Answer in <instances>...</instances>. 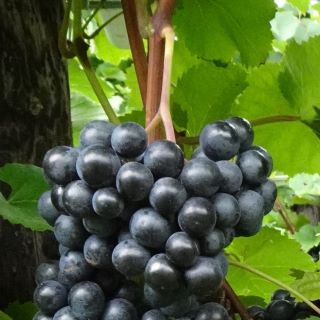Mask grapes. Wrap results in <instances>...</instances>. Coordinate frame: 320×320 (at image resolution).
<instances>
[{"label":"grapes","mask_w":320,"mask_h":320,"mask_svg":"<svg viewBox=\"0 0 320 320\" xmlns=\"http://www.w3.org/2000/svg\"><path fill=\"white\" fill-rule=\"evenodd\" d=\"M244 118L211 121L189 159L136 122L92 121L81 146L46 151L38 199L60 260L34 274L33 320H232L201 304L228 275L218 256L273 209V159ZM252 146V147H251Z\"/></svg>","instance_id":"grapes-1"},{"label":"grapes","mask_w":320,"mask_h":320,"mask_svg":"<svg viewBox=\"0 0 320 320\" xmlns=\"http://www.w3.org/2000/svg\"><path fill=\"white\" fill-rule=\"evenodd\" d=\"M296 297H290L286 289H278L274 292L272 303L264 308L253 306L247 312L253 320H297L311 316L320 318V314L305 302L295 306Z\"/></svg>","instance_id":"grapes-2"},{"label":"grapes","mask_w":320,"mask_h":320,"mask_svg":"<svg viewBox=\"0 0 320 320\" xmlns=\"http://www.w3.org/2000/svg\"><path fill=\"white\" fill-rule=\"evenodd\" d=\"M312 302L320 309V299L312 300Z\"/></svg>","instance_id":"grapes-3"}]
</instances>
